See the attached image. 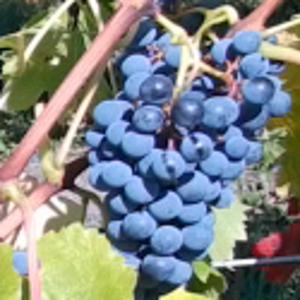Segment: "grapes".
Returning a JSON list of instances; mask_svg holds the SVG:
<instances>
[{
	"instance_id": "1",
	"label": "grapes",
	"mask_w": 300,
	"mask_h": 300,
	"mask_svg": "<svg viewBox=\"0 0 300 300\" xmlns=\"http://www.w3.org/2000/svg\"><path fill=\"white\" fill-rule=\"evenodd\" d=\"M263 35L244 30L216 42L213 64L175 90L182 50L148 19L120 53V98L98 103L85 140L93 192L105 195L104 235L144 243L141 270L154 286L188 284L235 202L233 181L265 156L260 136L292 107L281 89L284 60L258 53Z\"/></svg>"
}]
</instances>
